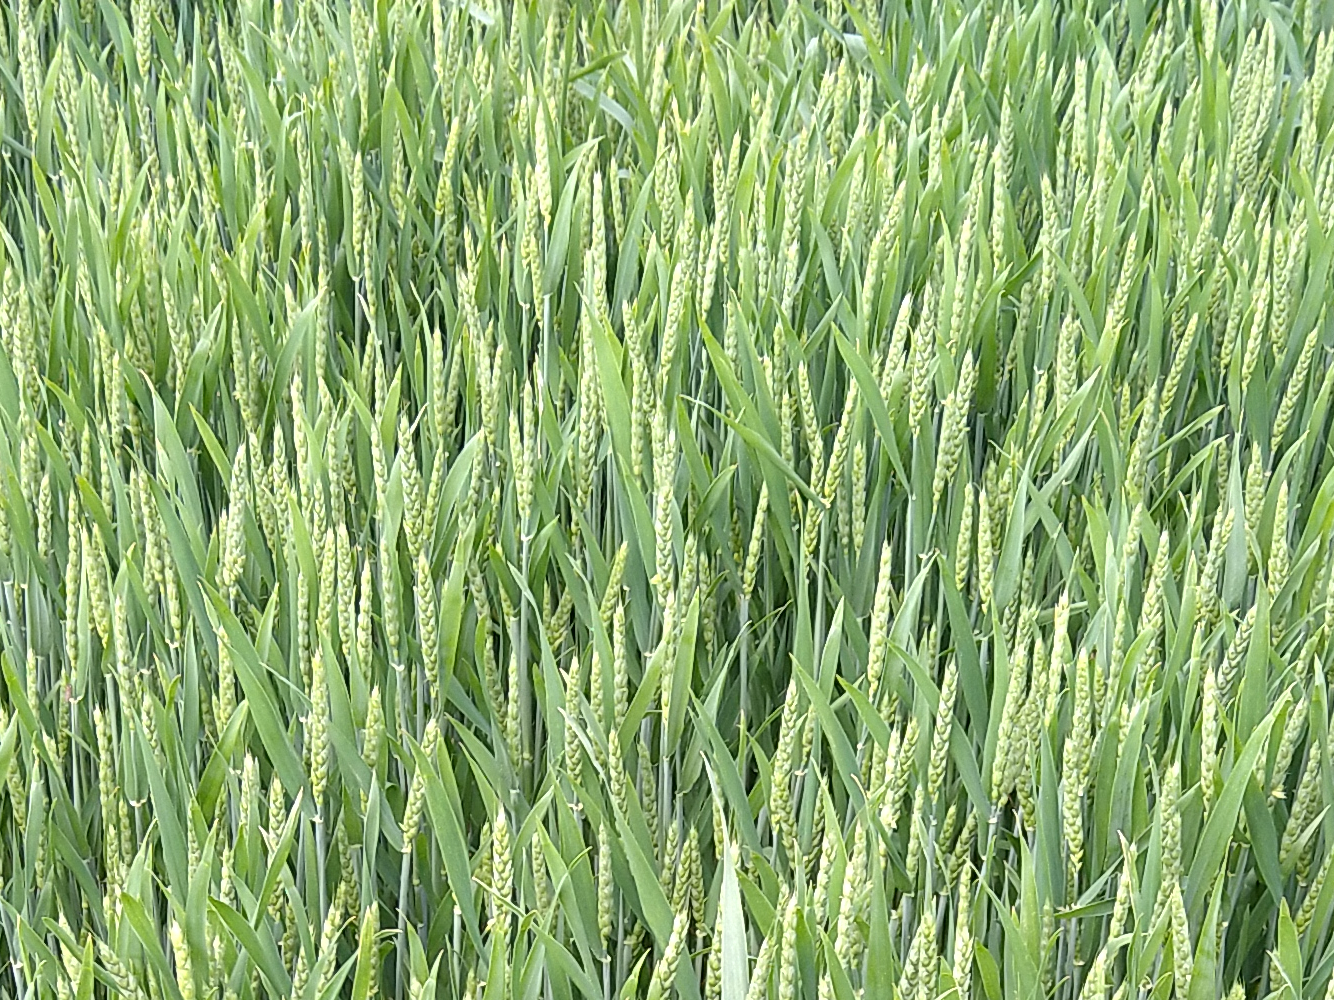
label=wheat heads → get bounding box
[55,922,101,1000]
[461,286,478,350]
[772,897,802,1000]
[388,124,405,218]
[1217,438,1226,504]
[462,454,483,521]
[36,476,51,553]
[445,24,461,111]
[515,100,528,142]
[405,717,438,841]
[798,698,817,770]
[1198,505,1231,604]
[1057,322,1080,437]
[1301,127,1319,179]
[642,0,661,77]
[113,601,129,714]
[924,665,959,805]
[1269,808,1334,976]
[143,246,160,333]
[166,174,177,229]
[1052,433,1068,477]
[529,210,548,315]
[356,559,371,676]
[352,151,363,258]
[465,77,484,155]
[1175,240,1187,332]
[638,745,659,859]
[663,819,681,893]
[133,0,153,75]
[1252,45,1276,174]
[14,0,43,125]
[1193,205,1215,277]
[1142,134,1151,167]
[815,74,832,117]
[299,715,310,764]
[187,815,198,887]
[755,180,766,299]
[478,321,496,421]
[320,214,327,284]
[1060,725,1084,869]
[1275,329,1317,437]
[909,63,930,100]
[650,489,671,599]
[139,496,165,600]
[918,914,938,1000]
[1256,697,1313,786]
[540,584,550,634]
[250,439,276,549]
[1015,382,1043,455]
[797,778,828,871]
[316,282,333,377]
[870,703,895,787]
[1286,219,1312,291]
[1311,33,1334,108]
[820,0,837,46]
[114,350,121,432]
[1129,383,1158,487]
[270,781,286,909]
[900,788,926,880]
[111,125,121,210]
[1041,903,1056,992]
[1172,893,1192,1000]
[837,127,880,261]
[1214,598,1276,703]
[532,833,547,916]
[337,821,351,913]
[1179,90,1202,175]
[1099,70,1112,174]
[312,891,341,981]
[1018,546,1036,618]
[133,89,153,169]
[430,330,452,445]
[518,180,533,266]
[1248,274,1272,371]
[423,450,449,557]
[505,413,526,516]
[886,726,899,786]
[1217,186,1246,278]
[1300,80,1309,127]
[571,455,598,527]
[162,559,181,634]
[1121,509,1145,583]
[606,727,623,805]
[162,284,192,361]
[947,808,975,885]
[1302,531,1334,601]
[538,11,557,58]
[444,194,455,258]
[120,798,133,864]
[382,539,405,656]
[365,228,374,313]
[770,312,789,398]
[535,113,552,208]
[975,488,993,594]
[926,103,939,189]
[1313,157,1328,208]
[362,900,384,987]
[499,587,522,639]
[349,0,368,118]
[501,79,517,167]
[89,540,111,641]
[987,642,1027,809]
[743,479,767,587]
[1058,948,1105,1000]
[465,217,478,280]
[910,283,937,429]
[856,77,875,147]
[0,268,16,351]
[60,681,67,765]
[992,85,1011,175]
[691,220,719,322]
[776,388,795,472]
[1326,125,1334,216]
[413,555,439,701]
[738,939,768,1000]
[795,362,822,460]
[1040,177,1053,308]
[363,693,385,771]
[691,827,699,922]
[577,269,601,376]
[1134,29,1157,75]
[1151,28,1169,86]
[1109,604,1126,711]
[650,412,677,493]
[1207,294,1223,377]
[63,488,79,659]
[217,445,249,588]
[59,46,81,152]
[1160,101,1174,160]
[833,66,849,157]
[1198,0,1217,58]
[803,457,823,570]
[377,349,385,416]
[980,463,1015,545]
[289,924,314,994]
[21,428,41,504]
[834,869,871,971]
[964,134,988,210]
[660,166,683,244]
[217,626,239,721]
[854,443,866,549]
[215,854,237,949]
[1225,289,1245,366]
[212,791,224,849]
[0,410,9,541]
[931,804,955,861]
[1206,160,1219,211]
[653,157,671,203]
[509,12,517,72]
[1162,312,1198,424]
[238,773,259,832]
[38,786,49,883]
[611,604,622,722]
[254,147,267,205]
[677,532,698,612]
[1314,915,1334,1000]
[330,522,352,661]
[494,806,513,935]
[866,139,897,234]
[1196,676,1217,806]
[481,821,492,881]
[863,0,882,50]
[1075,656,1090,771]
[560,155,596,252]
[1074,56,1091,178]
[19,300,47,416]
[172,922,197,1000]
[660,913,688,1000]
[957,484,975,592]
[129,463,142,543]
[183,97,212,196]
[1275,235,1283,355]
[596,823,616,939]
[1245,446,1264,522]
[826,374,861,500]
[1184,28,1198,83]
[948,354,974,477]
[504,654,521,786]
[683,44,701,95]
[1092,666,1106,733]
[704,923,724,999]
[97,418,119,517]
[627,372,644,477]
[1131,529,1173,688]
[978,13,1000,83]
[477,642,506,733]
[961,931,979,993]
[0,1,8,50]
[1068,172,1104,290]
[522,382,535,483]
[209,698,227,738]
[175,360,194,402]
[394,693,404,744]
[947,211,975,350]
[476,189,491,235]
[943,66,963,130]
[1119,25,1134,81]
[465,566,488,632]
[314,478,325,550]
[1002,670,1051,794]
[620,299,659,411]
[1004,589,1017,647]
[560,659,581,795]
[1120,380,1131,443]
[129,294,151,354]
[865,540,891,682]
[226,312,262,424]
[94,323,112,405]
[140,700,153,760]
[993,158,1004,271]
[42,229,48,300]
[219,29,249,105]
[919,625,937,677]
[292,391,310,517]
[574,366,596,462]
[298,3,310,76]
[364,422,385,511]
[959,866,974,933]
[194,300,206,342]
[27,649,32,716]
[704,758,726,863]
[661,599,677,727]
[889,721,924,826]
[361,334,376,391]
[723,301,737,371]
[808,825,833,920]
[664,206,700,363]
[0,708,21,816]
[299,573,305,695]
[544,587,574,653]
[94,706,112,820]
[1007,280,1032,380]
[123,981,140,1000]
[775,136,808,294]
[698,549,711,644]
[444,339,465,432]
[495,345,512,428]
[123,393,143,457]
[75,255,91,309]
[1156,766,1179,928]
[991,296,1005,388]
[729,133,742,183]
[107,827,121,902]
[1276,744,1324,854]
[836,457,849,548]
[1068,495,1079,538]
[584,179,607,277]
[931,402,958,496]
[302,158,311,246]
[327,427,345,527]
[483,488,501,559]
[100,941,178,1000]
[1225,25,1254,122]
[1103,850,1134,953]
[1265,481,1289,595]
[607,156,628,245]
[859,221,886,324]
[463,167,477,228]
[650,50,668,122]
[854,816,866,872]
[772,804,799,870]
[880,291,916,391]
[271,422,289,529]
[710,153,731,257]
[773,675,798,811]
[667,840,689,918]
[588,651,601,749]
[60,435,69,477]
[56,980,70,1000]
[1231,45,1264,174]
[92,81,117,152]
[315,531,333,653]
[1057,138,1068,216]
[433,118,457,213]
[397,416,416,551]
[139,556,155,610]
[598,542,629,621]
[887,923,923,1000]
[1109,234,1140,341]
[311,649,330,795]
[80,424,93,485]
